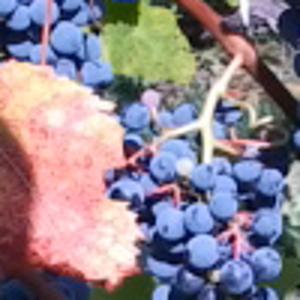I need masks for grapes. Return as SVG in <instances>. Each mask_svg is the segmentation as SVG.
Segmentation results:
<instances>
[{"mask_svg": "<svg viewBox=\"0 0 300 300\" xmlns=\"http://www.w3.org/2000/svg\"><path fill=\"white\" fill-rule=\"evenodd\" d=\"M190 103L167 108L132 101L117 114L124 150L134 173L123 166L105 175L113 202H131L135 215L149 214L140 230L151 245L145 267L157 283L152 300H282L273 282L284 261L272 246L283 235L287 185L277 167L258 155L236 160L216 156L199 162L178 128L195 122Z\"/></svg>", "mask_w": 300, "mask_h": 300, "instance_id": "grapes-1", "label": "grapes"}, {"mask_svg": "<svg viewBox=\"0 0 300 300\" xmlns=\"http://www.w3.org/2000/svg\"><path fill=\"white\" fill-rule=\"evenodd\" d=\"M5 18L1 44L22 64L48 65L57 76L70 80L81 74L83 85L106 92L114 72L102 63L103 45L97 34L82 27L99 23L104 7L84 0H0Z\"/></svg>", "mask_w": 300, "mask_h": 300, "instance_id": "grapes-2", "label": "grapes"}, {"mask_svg": "<svg viewBox=\"0 0 300 300\" xmlns=\"http://www.w3.org/2000/svg\"><path fill=\"white\" fill-rule=\"evenodd\" d=\"M244 118V111L238 105L229 104L227 100L221 99L215 105V112L213 116V127L215 137L227 142L231 138L229 128L238 125Z\"/></svg>", "mask_w": 300, "mask_h": 300, "instance_id": "grapes-3", "label": "grapes"}]
</instances>
